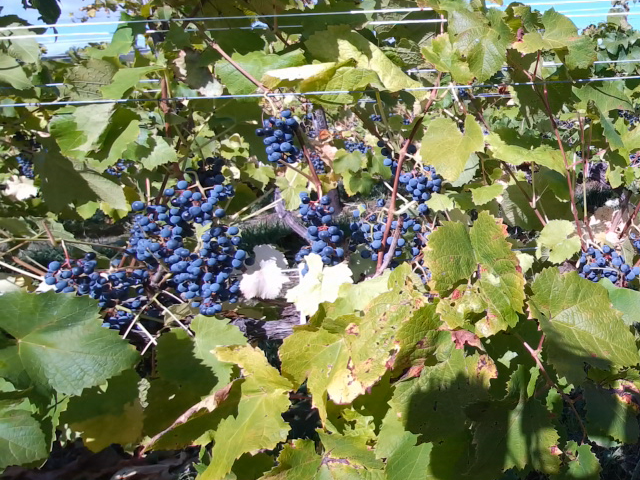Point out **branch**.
<instances>
[{"label": "branch", "instance_id": "30e6481e", "mask_svg": "<svg viewBox=\"0 0 640 480\" xmlns=\"http://www.w3.org/2000/svg\"><path fill=\"white\" fill-rule=\"evenodd\" d=\"M436 95H437V91H432V93L430 94L429 100L424 105V107L420 111L416 121L414 122L413 127H412V132L410 133L408 139L406 140V143L404 144L403 148L400 149V153H399V156H398V161H397V164H396L395 169H394V185H393V193H392V197H391V202H390V205H389V214H388V216L386 218L385 228L383 230V234H382V237H381V248L378 250V257H377L376 264H375V270L376 271L380 270V266H381V263L383 262V258H384V252H385V247H386V239H387V236H388V232L390 230L391 220H392V218L394 216V207H395L396 200H397V195H398L399 172H400V168H401L402 163H403L404 156L406 154V148L408 147V143L413 140L414 135L419 130V125H420V123L422 121V117L427 112L430 104L432 103V101L434 100Z\"/></svg>", "mask_w": 640, "mask_h": 480}, {"label": "branch", "instance_id": "325d2c04", "mask_svg": "<svg viewBox=\"0 0 640 480\" xmlns=\"http://www.w3.org/2000/svg\"><path fill=\"white\" fill-rule=\"evenodd\" d=\"M533 89L535 90V92L537 93L539 99L541 100L542 104L544 105V107L546 108V111L548 113V117L550 119V123L555 131V140L556 143L559 145V150L560 153L562 155L564 164H565V168H566V174L568 177V190L570 193V199H571V204L573 207V221L576 224L577 227V232H578V236L580 239V244H581V249L582 250H586L587 246H586V242H585V237H584V233L582 230V225L580 222V219L578 218V204L576 202V197H575V191H574V187H573V175L571 172V166H570V161L569 158L567 156L565 147H564V143L563 140L560 138V128L557 125V122L555 120V117L553 115V111L551 109L550 104L547 102L545 96L543 95L541 89L539 88L538 85H534Z\"/></svg>", "mask_w": 640, "mask_h": 480}, {"label": "branch", "instance_id": "170604dd", "mask_svg": "<svg viewBox=\"0 0 640 480\" xmlns=\"http://www.w3.org/2000/svg\"><path fill=\"white\" fill-rule=\"evenodd\" d=\"M207 42L216 50L220 53V55L227 61L229 62L232 67L240 72L242 75H244L248 80H250L252 83H254L257 87H259L260 89L264 90L267 94L269 92H271L270 88L267 85H264L263 83H261L259 80H257L254 76H252L249 72H247L246 70H244L242 67H240L239 65H237V63L234 61L233 58H231L221 46H218L217 43L211 39L208 38Z\"/></svg>", "mask_w": 640, "mask_h": 480}, {"label": "branch", "instance_id": "45aa463d", "mask_svg": "<svg viewBox=\"0 0 640 480\" xmlns=\"http://www.w3.org/2000/svg\"><path fill=\"white\" fill-rule=\"evenodd\" d=\"M502 166L504 167L505 172L507 173V176L510 178V180L516 185V187L518 188V190L520 191L521 195L524 197V200L526 201V203L529 205V207L531 208L532 212L534 213V216L536 217L537 221L539 222L541 227H545L546 223L545 221L542 219L541 214L539 213L538 209L536 208V206L534 205L533 201L531 200V198L529 197V195L526 193L524 187L522 186V184L519 182V180L517 178H515V176L513 175L512 171L509 168V165L507 164L506 160H502L501 161Z\"/></svg>", "mask_w": 640, "mask_h": 480}, {"label": "branch", "instance_id": "982ccf7c", "mask_svg": "<svg viewBox=\"0 0 640 480\" xmlns=\"http://www.w3.org/2000/svg\"><path fill=\"white\" fill-rule=\"evenodd\" d=\"M295 135L297 136V138H298V140H299V143H300V146H301V149H302V152H303V155H304L305 161L307 162V164H308V166H309L310 174H311V176H312V179L314 180V186H315V187H317V199H319V191H318V187H321V188H322V196H323V186H322V183L320 182L319 177L317 176V173H316V171H315V167H314L313 161L311 160V158H310V156H309L308 149H307V147H306V143H305V141H304V137H303V135L301 134V132H300V129H299V128H296V129H295Z\"/></svg>", "mask_w": 640, "mask_h": 480}, {"label": "branch", "instance_id": "1ff4a987", "mask_svg": "<svg viewBox=\"0 0 640 480\" xmlns=\"http://www.w3.org/2000/svg\"><path fill=\"white\" fill-rule=\"evenodd\" d=\"M167 97V83L165 79L161 80V98L160 101V109L164 113H170L172 111V106L170 103L166 102L165 98Z\"/></svg>", "mask_w": 640, "mask_h": 480}, {"label": "branch", "instance_id": "ea751061", "mask_svg": "<svg viewBox=\"0 0 640 480\" xmlns=\"http://www.w3.org/2000/svg\"><path fill=\"white\" fill-rule=\"evenodd\" d=\"M639 207H640V200H638V201L636 202V204L634 205L633 210L631 211V213H630V215H629V217H628L627 221H626V222H625V224L623 225V228L619 231V233H618V238H619V239H622V238H623V235H624V234H625V232L628 230V228H629V226L631 225V223H632V221H633V219H634V217H635L636 213L638 212Z\"/></svg>", "mask_w": 640, "mask_h": 480}, {"label": "branch", "instance_id": "ca6c30ca", "mask_svg": "<svg viewBox=\"0 0 640 480\" xmlns=\"http://www.w3.org/2000/svg\"><path fill=\"white\" fill-rule=\"evenodd\" d=\"M470 105L473 108V110L475 111V113L477 114V116H478L480 122L482 123V125L484 126L485 130L488 133H491L492 132V128L489 126L488 122L484 118V116H483L482 112L480 111L478 105L474 101H471Z\"/></svg>", "mask_w": 640, "mask_h": 480}, {"label": "branch", "instance_id": "1d269e1b", "mask_svg": "<svg viewBox=\"0 0 640 480\" xmlns=\"http://www.w3.org/2000/svg\"><path fill=\"white\" fill-rule=\"evenodd\" d=\"M510 64H511V65H513L514 67H516V68L520 69L522 72H524V74L526 75V77H527L529 80H532V79H533V74H532V73H530V72H529V70H528L526 67H524L522 64H520V63L516 62L514 59H511V60H510Z\"/></svg>", "mask_w": 640, "mask_h": 480}, {"label": "branch", "instance_id": "1af6ec82", "mask_svg": "<svg viewBox=\"0 0 640 480\" xmlns=\"http://www.w3.org/2000/svg\"><path fill=\"white\" fill-rule=\"evenodd\" d=\"M173 169L175 171L174 177L175 178H179L181 180L185 179V176L182 174L181 170L178 167V163L177 162H173L172 163Z\"/></svg>", "mask_w": 640, "mask_h": 480}]
</instances>
